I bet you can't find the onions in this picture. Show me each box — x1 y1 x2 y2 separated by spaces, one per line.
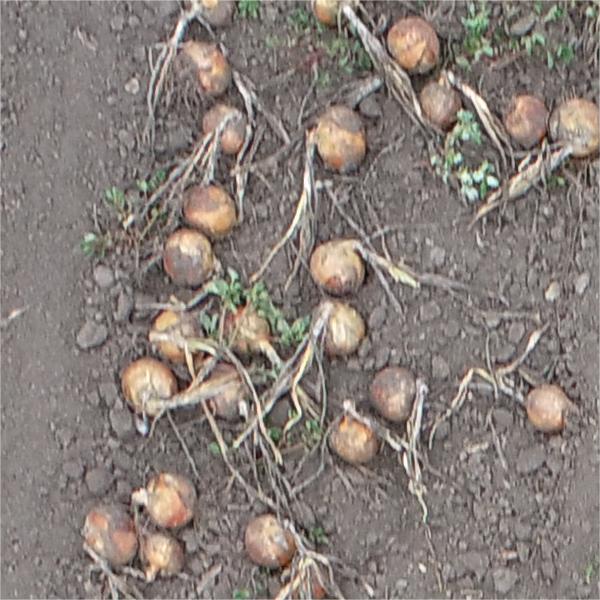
504 97 547 144
418 79 460 128
145 473 193 527
368 367 414 419
204 363 251 420
386 19 438 70
181 183 236 236
243 514 294 566
83 508 136 563
200 0 233 27
309 103 366 169
276 561 324 600
524 383 567 431
204 110 248 155
311 0 340 26
320 306 365 352
229 308 271 348
310 237 362 294
329 411 375 462
119 358 177 409
148 308 202 354
163 232 216 285
140 533 184 573
184 44 231 95
549 98 596 154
